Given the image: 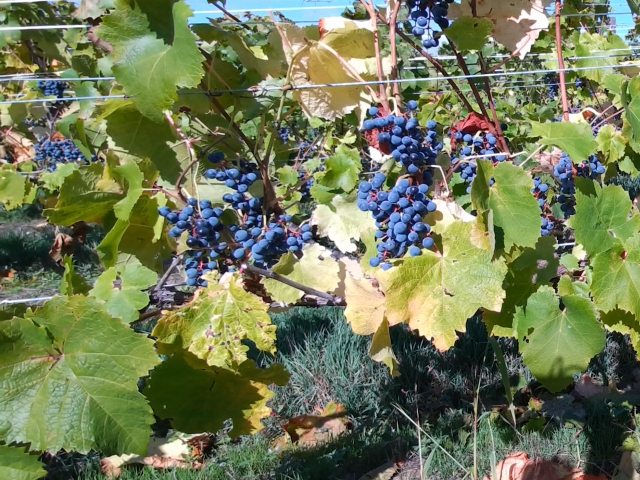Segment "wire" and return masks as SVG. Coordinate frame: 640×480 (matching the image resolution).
Returning a JSON list of instances; mask_svg holds the SVG:
<instances>
[{
  "label": "wire",
  "instance_id": "wire-2",
  "mask_svg": "<svg viewBox=\"0 0 640 480\" xmlns=\"http://www.w3.org/2000/svg\"><path fill=\"white\" fill-rule=\"evenodd\" d=\"M125 94H112V95H89V96H77V97H59V98H45V99H23L18 101H0V106H20L25 104H47V103H61V102H79V101H91V100H114L125 99Z\"/></svg>",
  "mask_w": 640,
  "mask_h": 480
},
{
  "label": "wire",
  "instance_id": "wire-3",
  "mask_svg": "<svg viewBox=\"0 0 640 480\" xmlns=\"http://www.w3.org/2000/svg\"><path fill=\"white\" fill-rule=\"evenodd\" d=\"M307 10H348L353 11L350 5H305L288 7H265V8H229V13H267V12H290Z\"/></svg>",
  "mask_w": 640,
  "mask_h": 480
},
{
  "label": "wire",
  "instance_id": "wire-4",
  "mask_svg": "<svg viewBox=\"0 0 640 480\" xmlns=\"http://www.w3.org/2000/svg\"><path fill=\"white\" fill-rule=\"evenodd\" d=\"M92 23H63L53 26H40V25H5L0 26V31H8V30H38V31H55L65 28H75V29H86L92 28Z\"/></svg>",
  "mask_w": 640,
  "mask_h": 480
},
{
  "label": "wire",
  "instance_id": "wire-5",
  "mask_svg": "<svg viewBox=\"0 0 640 480\" xmlns=\"http://www.w3.org/2000/svg\"><path fill=\"white\" fill-rule=\"evenodd\" d=\"M54 296L29 297L17 300H0V305H19L32 302L54 301Z\"/></svg>",
  "mask_w": 640,
  "mask_h": 480
},
{
  "label": "wire",
  "instance_id": "wire-1",
  "mask_svg": "<svg viewBox=\"0 0 640 480\" xmlns=\"http://www.w3.org/2000/svg\"><path fill=\"white\" fill-rule=\"evenodd\" d=\"M632 67H640V62H630L620 65H588V66H573L563 69H526L515 72H486L476 74H457L449 76H433L425 78H381L374 80H362V81H348L338 83H300V84H274L267 85L259 88H227V89H207V90H192V91H179V96H194V95H209V94H229V93H261L269 90L276 89H290L298 90L302 88H340L350 86H364V85H376L383 83H426L435 81H451L459 79H478L488 77H517L528 74H565L576 71H590V70H622Z\"/></svg>",
  "mask_w": 640,
  "mask_h": 480
}]
</instances>
